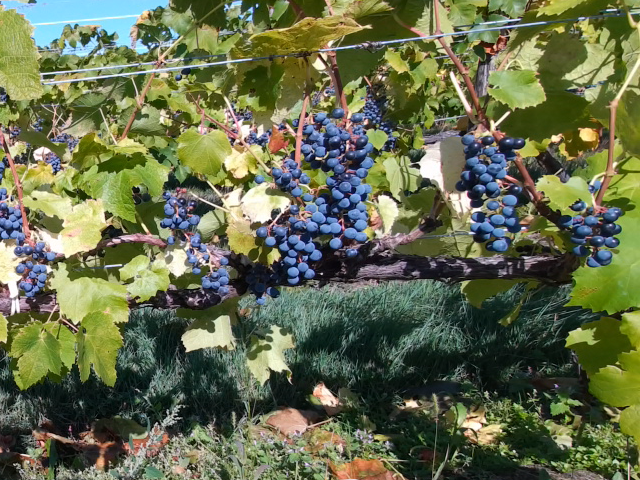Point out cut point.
Masks as SVG:
<instances>
[{"instance_id":"1","label":"cut point","mask_w":640,"mask_h":480,"mask_svg":"<svg viewBox=\"0 0 640 480\" xmlns=\"http://www.w3.org/2000/svg\"><path fill=\"white\" fill-rule=\"evenodd\" d=\"M606 173H607V171L600 172V173H598L597 175H595L594 177H592V178H591V181H590V185H593V183H594V181H595L596 179L600 178L602 175H606Z\"/></svg>"}]
</instances>
